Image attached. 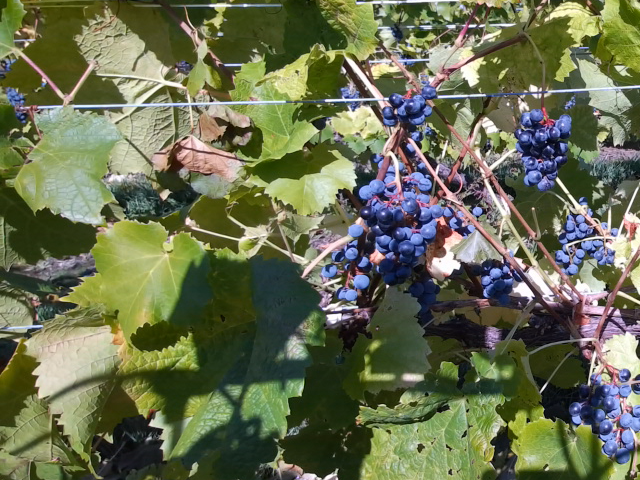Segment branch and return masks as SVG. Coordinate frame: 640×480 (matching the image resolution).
Returning a JSON list of instances; mask_svg holds the SVG:
<instances>
[{"mask_svg":"<svg viewBox=\"0 0 640 480\" xmlns=\"http://www.w3.org/2000/svg\"><path fill=\"white\" fill-rule=\"evenodd\" d=\"M429 104L435 110V112L439 115V117L441 118V120H442L443 124L446 126V128L463 145L462 146V150L460 151L459 155L457 156V158L455 159L453 164L450 166L447 174L445 175V179H442V177L438 174V172L436 171L434 165L432 164L430 159L426 156L425 152L422 150V147L420 146L419 142L415 138L410 136L409 131L407 129H403L404 122L402 120H399L397 122V125L395 126V128L393 129V131L391 133V136L389 138V142L387 144V148L385 150V154H384V158H383V161H382V165H381L380 171L377 173V178L379 180H382L384 178L385 174L387 173V170L389 168V163L391 161L392 153L396 149V146L398 144L399 138H400V136L402 134L403 139L408 144H411L413 146V148L415 149V152L418 154V156L421 159V161L425 164V166L427 167V169H428L429 173L431 174V176L441 186L434 193V195L432 197V200L430 201V204L432 206H436L438 204L441 196L443 195L444 190H445L447 192V194L458 203V205L464 211L465 217L469 220V222L471 224H473L478 229V233L483 237L484 241L490 247H492L499 254L503 255L509 261V263L514 268V270L519 274L520 278L522 279V282L529 287V289L531 290V292L535 296H537V299H538L539 303L541 304V306L543 307V309L555 320V322L557 324H559L561 327L569 330L571 336L574 338L575 343L582 350L583 358L585 360H588L590 358L591 351L589 350L588 346L582 341V338L578 334L577 329L575 328V326L572 323H569V322L565 321L564 319H562L559 316V314L550 307V305L548 304V302L546 301V299L544 297V294H540L535 289L534 285L530 282V280L523 274L519 263L509 254V251H507L505 248L501 247L499 244H497L494 240L491 239L490 235L486 231L487 227L485 225H483L482 223H480L473 216V214L471 212V209L468 207V205L465 203V201L450 187L452 178H453L457 168L460 166V164L462 163V161L464 160V158L466 157V155L468 153L476 161V166H477L476 167V172H477L478 178H479L480 182L482 183V185L484 187V190L487 192V194L490 196V198L492 199L493 203L495 204V207H496L497 211L499 212L501 220H504V226L507 228L509 235L517 243V245L519 246L521 251L527 256V259L532 264L534 270L539 275V277L544 281V283L547 285V287L552 292V294L556 298H558L560 300V302L565 307H569L571 305V302L557 289V287L554 285V283L551 281V279L548 277V275L543 271V269L540 266L539 262L535 258L533 252L526 246V244L524 243L523 239L517 234L514 226L512 225V223H511V221H510V219H509V217L507 215V212H506L505 208L502 205V202H501L500 198L498 197L497 193L491 188V184L489 183L488 179L486 178L484 170L487 172L488 176L490 177L493 185L497 189V191L500 194V196L502 197V199L510 206V208H511L513 214L515 215V217L522 223V225L526 229L527 233L538 244V246L540 247V249L542 250L544 255L549 259V261L551 262V264L553 265L555 270L558 272L560 277L563 279L565 284L571 289V291L576 296H579L581 300L585 299V294L583 292H581V291H578V289L569 280V278L565 275L564 271L558 265L557 261L554 259L552 254L548 251L547 247L544 245V243L541 241V239L533 232V230L529 226V224L526 221V219L523 218V216L518 212V209L515 206V204L512 202V200L505 194L504 190L502 189L501 185L498 183V181H497L495 175L493 174L492 170L489 168V166L486 163H484L482 161L481 156H480V149H475V150L471 149L470 142L472 140L473 132H474L475 128L477 127V125L480 123V121L483 119V116L481 114H477L474 117L473 121L470 123V125L468 126V128L466 130L465 138H463L458 133V131L455 128H453V126L449 123L447 117L445 116L443 111L437 106L436 102L433 99L429 100Z\"/></svg>","mask_w":640,"mask_h":480,"instance_id":"branch-1","label":"branch"},{"mask_svg":"<svg viewBox=\"0 0 640 480\" xmlns=\"http://www.w3.org/2000/svg\"><path fill=\"white\" fill-rule=\"evenodd\" d=\"M527 37L528 32L526 30H519L518 32H515L513 35L507 36L501 41L494 42L480 49L471 51L461 58H457L435 76V78L432 80V85L434 87H439L445 81V79L452 76L457 70L461 69L462 67H465L475 60H479L498 51L505 50L511 45L517 44Z\"/></svg>","mask_w":640,"mask_h":480,"instance_id":"branch-2","label":"branch"},{"mask_svg":"<svg viewBox=\"0 0 640 480\" xmlns=\"http://www.w3.org/2000/svg\"><path fill=\"white\" fill-rule=\"evenodd\" d=\"M378 47L381 49V51L386 54V56L388 57V59L407 77V79L410 81L412 87L417 91L420 92L421 88L417 85L416 80L412 77V75L410 74V72L404 68L397 59L394 58V56L391 54V52L386 48V46L382 43L379 42L378 43Z\"/></svg>","mask_w":640,"mask_h":480,"instance_id":"branch-5","label":"branch"},{"mask_svg":"<svg viewBox=\"0 0 640 480\" xmlns=\"http://www.w3.org/2000/svg\"><path fill=\"white\" fill-rule=\"evenodd\" d=\"M343 56L347 59L349 65L364 79L366 84L371 88V91L373 92L374 96L383 97L381 95V92L378 86L373 82V80L366 73V71L362 69V67L355 61L352 54L349 51H345L343 53Z\"/></svg>","mask_w":640,"mask_h":480,"instance_id":"branch-4","label":"branch"},{"mask_svg":"<svg viewBox=\"0 0 640 480\" xmlns=\"http://www.w3.org/2000/svg\"><path fill=\"white\" fill-rule=\"evenodd\" d=\"M638 257H640V246L637 247V252L633 254V257H632V259L630 261V264L625 269L623 274L620 276L618 281L614 284V287L612 288L611 293L609 294L605 304L603 305L602 312L600 314V319H599L598 324L596 326V330L593 333V340H592V346L593 347L597 346L598 336H599V333L601 332L602 326L604 324L605 317H606V314H607V310H608L612 300L614 299V297H615L620 285L624 282V280L629 275L630 271L634 268Z\"/></svg>","mask_w":640,"mask_h":480,"instance_id":"branch-3","label":"branch"}]
</instances>
